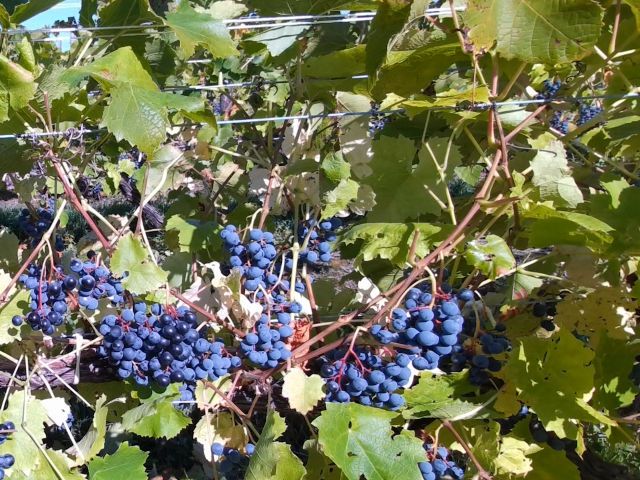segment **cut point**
<instances>
[{"mask_svg":"<svg viewBox=\"0 0 640 480\" xmlns=\"http://www.w3.org/2000/svg\"><path fill=\"white\" fill-rule=\"evenodd\" d=\"M424 270H425L426 272L430 273V274H429V278H430V280H431L432 286H433V287H436V277H435L434 272H433L432 270L428 269L427 267H426V268H424Z\"/></svg>","mask_w":640,"mask_h":480,"instance_id":"7d7e1d6f","label":"cut point"},{"mask_svg":"<svg viewBox=\"0 0 640 480\" xmlns=\"http://www.w3.org/2000/svg\"><path fill=\"white\" fill-rule=\"evenodd\" d=\"M360 329H361V326H357V328H356V330H355V332H354V335H353V339H352V342H351V346H354V345H355V340H356V338H357V334H358V332H359V330H360Z\"/></svg>","mask_w":640,"mask_h":480,"instance_id":"deb38ca7","label":"cut point"},{"mask_svg":"<svg viewBox=\"0 0 640 480\" xmlns=\"http://www.w3.org/2000/svg\"><path fill=\"white\" fill-rule=\"evenodd\" d=\"M47 251L48 253L46 254V256L44 257V261H47L48 258L49 259H53V255H52V245H51V241L49 240L47 245H46Z\"/></svg>","mask_w":640,"mask_h":480,"instance_id":"6a23745f","label":"cut point"}]
</instances>
